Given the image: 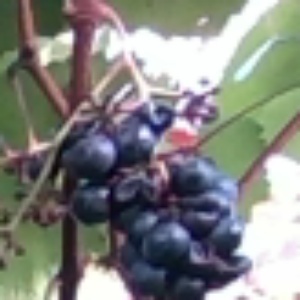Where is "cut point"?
I'll use <instances>...</instances> for the list:
<instances>
[{
  "label": "cut point",
  "instance_id": "cut-point-1",
  "mask_svg": "<svg viewBox=\"0 0 300 300\" xmlns=\"http://www.w3.org/2000/svg\"><path fill=\"white\" fill-rule=\"evenodd\" d=\"M110 22L114 28H116V43L119 47L124 64L130 77L138 89L139 96L144 102L145 108L148 111H152L155 107V91L148 85L147 81L144 79L142 72L139 70L135 57L132 55L130 46L125 39L126 25L118 14L116 9L106 2L101 4V28Z\"/></svg>",
  "mask_w": 300,
  "mask_h": 300
}]
</instances>
